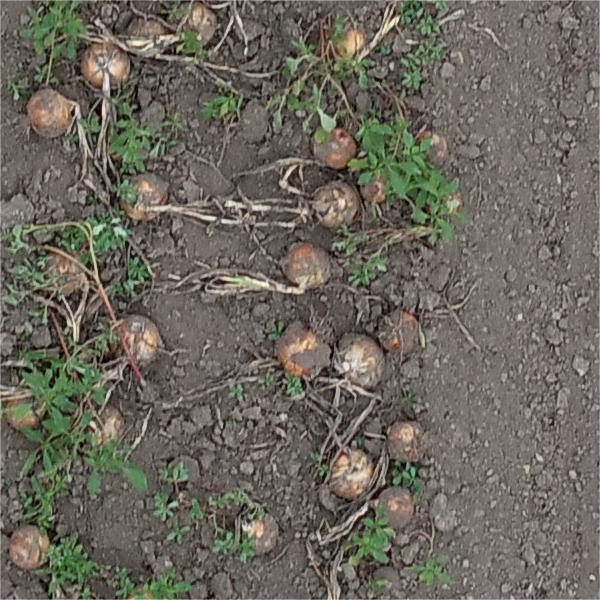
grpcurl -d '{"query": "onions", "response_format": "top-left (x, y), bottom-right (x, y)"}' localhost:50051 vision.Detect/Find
top-left (316, 127), bottom-right (356, 166)
top-left (312, 181), bottom-right (356, 226)
top-left (46, 245), bottom-right (90, 292)
top-left (361, 177), bottom-right (384, 206)
top-left (119, 171), bottom-right (164, 217)
top-left (7, 401), bottom-right (38, 434)
top-left (112, 315), bottom-right (162, 368)
top-left (332, 334), bottom-right (385, 384)
top-left (284, 242), bottom-right (334, 289)
top-left (276, 323), bottom-right (327, 380)
top-left (378, 313), bottom-right (421, 352)
top-left (375, 487), bottom-right (412, 527)
top-left (384, 421), bottom-right (422, 460)
top-left (182, 5), bottom-right (216, 42)
top-left (24, 87), bottom-right (74, 135)
top-left (8, 525), bottom-right (47, 568)
top-left (330, 23), bottom-right (365, 58)
top-left (120, 27), bottom-right (162, 58)
top-left (254, 518), bottom-right (281, 553)
top-left (416, 127), bottom-right (445, 165)
top-left (91, 405), bottom-right (124, 444)
top-left (330, 448), bottom-right (376, 498)
top-left (81, 45), bottom-right (128, 87)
